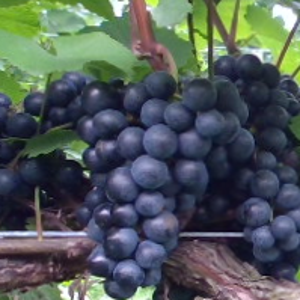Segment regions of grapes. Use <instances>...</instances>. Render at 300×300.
<instances>
[{"label": "grapes", "instance_id": "grapes-1", "mask_svg": "<svg viewBox=\"0 0 300 300\" xmlns=\"http://www.w3.org/2000/svg\"><path fill=\"white\" fill-rule=\"evenodd\" d=\"M175 87L169 71H151L138 84L113 78L82 93L80 136L92 185L76 217L96 241L89 270L106 278L114 299L161 280L178 244V210L193 208L210 176H231L254 150L243 128L250 104L236 81L190 77L184 98L167 103Z\"/></svg>", "mask_w": 300, "mask_h": 300}]
</instances>
